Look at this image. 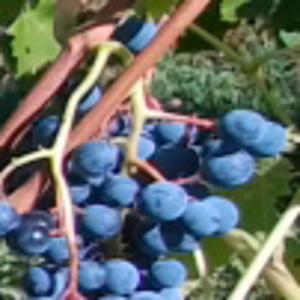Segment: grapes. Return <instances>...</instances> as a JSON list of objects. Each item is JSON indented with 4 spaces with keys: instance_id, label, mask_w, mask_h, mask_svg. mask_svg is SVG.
Instances as JSON below:
<instances>
[{
    "instance_id": "1",
    "label": "grapes",
    "mask_w": 300,
    "mask_h": 300,
    "mask_svg": "<svg viewBox=\"0 0 300 300\" xmlns=\"http://www.w3.org/2000/svg\"><path fill=\"white\" fill-rule=\"evenodd\" d=\"M131 117L106 119L64 163L70 193L48 209L17 213L0 201V238L20 258L44 257L26 290L33 300H181L184 261L199 241L234 233L241 207L211 188L241 189L254 156L282 153L287 126L253 109L222 113L216 136L181 121L148 125L130 157Z\"/></svg>"
},
{
    "instance_id": "2",
    "label": "grapes",
    "mask_w": 300,
    "mask_h": 300,
    "mask_svg": "<svg viewBox=\"0 0 300 300\" xmlns=\"http://www.w3.org/2000/svg\"><path fill=\"white\" fill-rule=\"evenodd\" d=\"M157 32V22L153 19H148L118 29L115 33V38L121 43H125V46L131 52L140 54L150 45Z\"/></svg>"
},
{
    "instance_id": "3",
    "label": "grapes",
    "mask_w": 300,
    "mask_h": 300,
    "mask_svg": "<svg viewBox=\"0 0 300 300\" xmlns=\"http://www.w3.org/2000/svg\"><path fill=\"white\" fill-rule=\"evenodd\" d=\"M61 118L56 113H49L36 120L29 130V145L35 149H50L59 134Z\"/></svg>"
},
{
    "instance_id": "4",
    "label": "grapes",
    "mask_w": 300,
    "mask_h": 300,
    "mask_svg": "<svg viewBox=\"0 0 300 300\" xmlns=\"http://www.w3.org/2000/svg\"><path fill=\"white\" fill-rule=\"evenodd\" d=\"M103 97V88L99 84H93L79 102L77 113L85 116Z\"/></svg>"
}]
</instances>
